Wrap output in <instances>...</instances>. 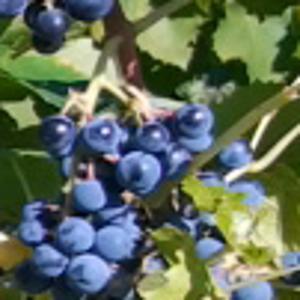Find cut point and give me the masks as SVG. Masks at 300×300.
Returning a JSON list of instances; mask_svg holds the SVG:
<instances>
[{"instance_id":"1","label":"cut point","mask_w":300,"mask_h":300,"mask_svg":"<svg viewBox=\"0 0 300 300\" xmlns=\"http://www.w3.org/2000/svg\"><path fill=\"white\" fill-rule=\"evenodd\" d=\"M115 48L116 40L110 36L95 66V72L90 79V83L84 91L82 105L85 108H90L95 103L100 90L103 89V91L108 94H113L116 91V86L109 80L111 74V59Z\"/></svg>"}]
</instances>
